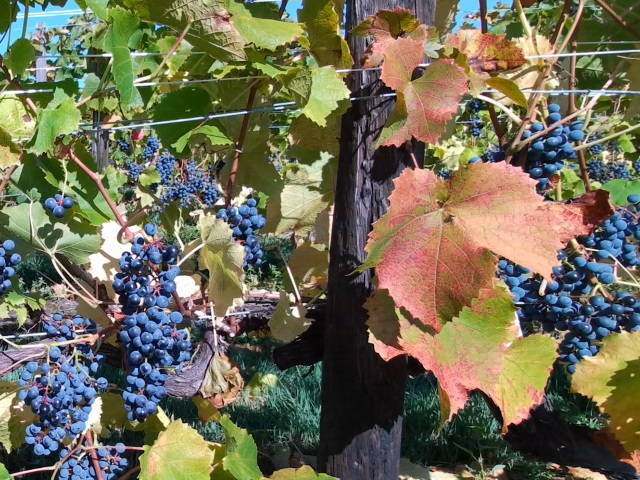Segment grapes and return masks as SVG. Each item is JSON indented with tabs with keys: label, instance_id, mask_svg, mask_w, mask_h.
<instances>
[{
	"label": "grapes",
	"instance_id": "grapes-4",
	"mask_svg": "<svg viewBox=\"0 0 640 480\" xmlns=\"http://www.w3.org/2000/svg\"><path fill=\"white\" fill-rule=\"evenodd\" d=\"M583 122L573 120L571 125H557L546 136H539L528 146L526 166L533 179L540 181L539 190H546L549 184V173L564 168L562 159H576L577 151L573 150L570 141L584 138Z\"/></svg>",
	"mask_w": 640,
	"mask_h": 480
},
{
	"label": "grapes",
	"instance_id": "grapes-14",
	"mask_svg": "<svg viewBox=\"0 0 640 480\" xmlns=\"http://www.w3.org/2000/svg\"><path fill=\"white\" fill-rule=\"evenodd\" d=\"M549 117L546 118L548 127H552L556 122L562 119L561 106L558 103H550L548 105Z\"/></svg>",
	"mask_w": 640,
	"mask_h": 480
},
{
	"label": "grapes",
	"instance_id": "grapes-13",
	"mask_svg": "<svg viewBox=\"0 0 640 480\" xmlns=\"http://www.w3.org/2000/svg\"><path fill=\"white\" fill-rule=\"evenodd\" d=\"M105 448H97L95 449L96 459L98 460V467L100 469H106L109 465L108 457L113 455V450L111 445H107Z\"/></svg>",
	"mask_w": 640,
	"mask_h": 480
},
{
	"label": "grapes",
	"instance_id": "grapes-7",
	"mask_svg": "<svg viewBox=\"0 0 640 480\" xmlns=\"http://www.w3.org/2000/svg\"><path fill=\"white\" fill-rule=\"evenodd\" d=\"M82 454V450L75 451V457H71L61 464L58 480H97L91 453L87 452L78 461L76 457Z\"/></svg>",
	"mask_w": 640,
	"mask_h": 480
},
{
	"label": "grapes",
	"instance_id": "grapes-12",
	"mask_svg": "<svg viewBox=\"0 0 640 480\" xmlns=\"http://www.w3.org/2000/svg\"><path fill=\"white\" fill-rule=\"evenodd\" d=\"M37 372H38V362L28 361L25 364V371L21 372V376L19 377L20 379L18 380V384L21 387H27L28 386L27 381H30L33 377V374Z\"/></svg>",
	"mask_w": 640,
	"mask_h": 480
},
{
	"label": "grapes",
	"instance_id": "grapes-16",
	"mask_svg": "<svg viewBox=\"0 0 640 480\" xmlns=\"http://www.w3.org/2000/svg\"><path fill=\"white\" fill-rule=\"evenodd\" d=\"M544 130V126L542 123L539 122H533L531 124V128L526 129V131L524 132L523 138L524 139H529L531 136L538 134L539 132H542Z\"/></svg>",
	"mask_w": 640,
	"mask_h": 480
},
{
	"label": "grapes",
	"instance_id": "grapes-6",
	"mask_svg": "<svg viewBox=\"0 0 640 480\" xmlns=\"http://www.w3.org/2000/svg\"><path fill=\"white\" fill-rule=\"evenodd\" d=\"M257 200L249 198L246 205H240L238 209L222 208L216 212L218 219L228 221L231 218L230 229L236 236L246 235V245L244 246V257L242 267L246 268L251 260L257 258L256 266L262 264L264 252L259 247V240L253 234V228L264 229L267 226V219L263 214L258 213Z\"/></svg>",
	"mask_w": 640,
	"mask_h": 480
},
{
	"label": "grapes",
	"instance_id": "grapes-8",
	"mask_svg": "<svg viewBox=\"0 0 640 480\" xmlns=\"http://www.w3.org/2000/svg\"><path fill=\"white\" fill-rule=\"evenodd\" d=\"M15 242L13 240H4L0 247V292H5L12 288V280L15 276V269L12 266L19 265L22 262L20 253L6 255V251H13Z\"/></svg>",
	"mask_w": 640,
	"mask_h": 480
},
{
	"label": "grapes",
	"instance_id": "grapes-2",
	"mask_svg": "<svg viewBox=\"0 0 640 480\" xmlns=\"http://www.w3.org/2000/svg\"><path fill=\"white\" fill-rule=\"evenodd\" d=\"M573 265L576 271H568L563 284L558 279L546 285V289L553 294L539 296L538 290L542 286L540 280L526 278L530 269L518 265L515 267L510 261L501 259L498 263L496 277L501 278L505 285H509L513 301H525L516 315L522 321L536 320L542 323L547 332L571 330L560 343L563 352L560 361L569 363L566 371L575 373V363L580 362L581 356L592 357L600 353V345H590L599 337H608L619 331L622 325L627 331H638L640 327V297L625 291L615 293L616 300L621 304L605 302V298L596 295L588 299V304L572 301L571 292L575 287L581 293H591L590 281L594 276L604 284L615 281L614 268L609 264L600 265L598 262L587 261L582 257H575Z\"/></svg>",
	"mask_w": 640,
	"mask_h": 480
},
{
	"label": "grapes",
	"instance_id": "grapes-5",
	"mask_svg": "<svg viewBox=\"0 0 640 480\" xmlns=\"http://www.w3.org/2000/svg\"><path fill=\"white\" fill-rule=\"evenodd\" d=\"M603 233L601 237H596L591 233L590 237H578L577 241L583 243L585 247H599L596 256L599 259L609 260L617 258L623 267L640 266V257H636L635 245L626 241V237H633L640 241V222L634 223L630 213L617 209L616 214H612L602 224Z\"/></svg>",
	"mask_w": 640,
	"mask_h": 480
},
{
	"label": "grapes",
	"instance_id": "grapes-11",
	"mask_svg": "<svg viewBox=\"0 0 640 480\" xmlns=\"http://www.w3.org/2000/svg\"><path fill=\"white\" fill-rule=\"evenodd\" d=\"M128 466L129 460L127 458L116 457L114 463L110 465V469L101 472V477L104 480H117V475H120Z\"/></svg>",
	"mask_w": 640,
	"mask_h": 480
},
{
	"label": "grapes",
	"instance_id": "grapes-3",
	"mask_svg": "<svg viewBox=\"0 0 640 480\" xmlns=\"http://www.w3.org/2000/svg\"><path fill=\"white\" fill-rule=\"evenodd\" d=\"M51 362L61 364V370L56 375H51L50 386L54 390V396L40 395L37 387L26 390H18L17 395L30 410L39 415L40 422L31 423L25 428L24 442L34 445L33 452L36 455L48 456L52 451H57L59 442L67 436L75 439L79 432L86 429V420L92 412L97 391L92 386H86L83 382L85 374L98 373L100 365L106 360L104 353H97L95 360L89 363V367L81 363L75 365V359L70 354L62 355L60 348H52L49 352ZM46 425L50 432L42 438V444L38 443L39 435Z\"/></svg>",
	"mask_w": 640,
	"mask_h": 480
},
{
	"label": "grapes",
	"instance_id": "grapes-15",
	"mask_svg": "<svg viewBox=\"0 0 640 480\" xmlns=\"http://www.w3.org/2000/svg\"><path fill=\"white\" fill-rule=\"evenodd\" d=\"M39 368L43 374V377L40 378V385L47 386L49 384L48 374L51 372V365L50 363L44 362L39 365Z\"/></svg>",
	"mask_w": 640,
	"mask_h": 480
},
{
	"label": "grapes",
	"instance_id": "grapes-10",
	"mask_svg": "<svg viewBox=\"0 0 640 480\" xmlns=\"http://www.w3.org/2000/svg\"><path fill=\"white\" fill-rule=\"evenodd\" d=\"M74 325H83L85 328H95L96 322L92 319H85L81 314H76L71 319H67L60 327V332L64 337H58L57 342L71 340L74 338Z\"/></svg>",
	"mask_w": 640,
	"mask_h": 480
},
{
	"label": "grapes",
	"instance_id": "grapes-9",
	"mask_svg": "<svg viewBox=\"0 0 640 480\" xmlns=\"http://www.w3.org/2000/svg\"><path fill=\"white\" fill-rule=\"evenodd\" d=\"M45 207L52 211L56 218H63L66 215V209L74 207V200L71 197H64L62 193H56L54 198L46 199Z\"/></svg>",
	"mask_w": 640,
	"mask_h": 480
},
{
	"label": "grapes",
	"instance_id": "grapes-1",
	"mask_svg": "<svg viewBox=\"0 0 640 480\" xmlns=\"http://www.w3.org/2000/svg\"><path fill=\"white\" fill-rule=\"evenodd\" d=\"M143 244L142 236L135 237L131 252L120 254L118 266L121 273L115 274L111 283L113 291L120 295L119 303L123 305L121 311L128 315L122 319L126 327L119 333L126 355L129 356L127 367L131 371L126 376V387L122 392L124 409L128 412L129 421L138 419L140 422L147 420V413L154 414L157 411L158 403L167 393V388L161 386L167 380V375L153 369V365L157 368L179 367L191 360L190 351L193 349V342L184 340L187 332L173 331L171 326V323H183L182 313L173 311L166 315L164 310L155 308L156 305L159 308L170 305L171 293L177 291L174 280L181 274V268L173 265L170 270L159 273L161 289L157 296L149 286L151 278L138 273L144 269V261L147 260L156 265L174 263L179 255L178 247L168 245L159 251L156 245H151L143 251ZM143 388L150 400L144 394L134 393Z\"/></svg>",
	"mask_w": 640,
	"mask_h": 480
}]
</instances>
